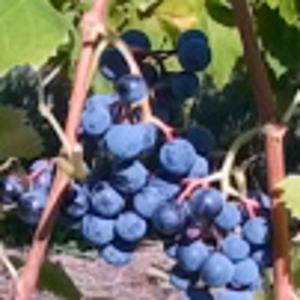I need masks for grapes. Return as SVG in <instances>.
I'll use <instances>...</instances> for the list:
<instances>
[{
    "label": "grapes",
    "mask_w": 300,
    "mask_h": 300,
    "mask_svg": "<svg viewBox=\"0 0 300 300\" xmlns=\"http://www.w3.org/2000/svg\"><path fill=\"white\" fill-rule=\"evenodd\" d=\"M207 44L203 31H184L177 59L185 72L161 75L149 62L133 75L115 46L102 51L100 72L114 82L116 96L89 97L80 128L118 159L108 179L66 189L60 216L81 225L82 235L114 266L126 265L151 229L162 234L165 256L177 261L170 285L187 300H251L272 265L266 247L274 226L263 217L248 219L203 179L211 173L212 132L179 128L183 100L199 91L193 73L212 61Z\"/></svg>",
    "instance_id": "01657485"
},
{
    "label": "grapes",
    "mask_w": 300,
    "mask_h": 300,
    "mask_svg": "<svg viewBox=\"0 0 300 300\" xmlns=\"http://www.w3.org/2000/svg\"><path fill=\"white\" fill-rule=\"evenodd\" d=\"M27 176L32 180V189L24 191L21 181L14 175L0 179V202L16 203V215L26 225H36L41 215L51 184V171L43 159H35L27 166Z\"/></svg>",
    "instance_id": "b958b902"
},
{
    "label": "grapes",
    "mask_w": 300,
    "mask_h": 300,
    "mask_svg": "<svg viewBox=\"0 0 300 300\" xmlns=\"http://www.w3.org/2000/svg\"><path fill=\"white\" fill-rule=\"evenodd\" d=\"M122 39L128 47L140 51H147L151 47L150 38L141 30H126L122 34Z\"/></svg>",
    "instance_id": "0513c4c2"
}]
</instances>
